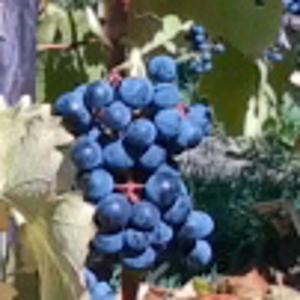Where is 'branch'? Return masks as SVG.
<instances>
[{
  "instance_id": "1",
  "label": "branch",
  "mask_w": 300,
  "mask_h": 300,
  "mask_svg": "<svg viewBox=\"0 0 300 300\" xmlns=\"http://www.w3.org/2000/svg\"><path fill=\"white\" fill-rule=\"evenodd\" d=\"M113 32L111 38L110 66H125L124 39L127 27V1L112 2Z\"/></svg>"
}]
</instances>
